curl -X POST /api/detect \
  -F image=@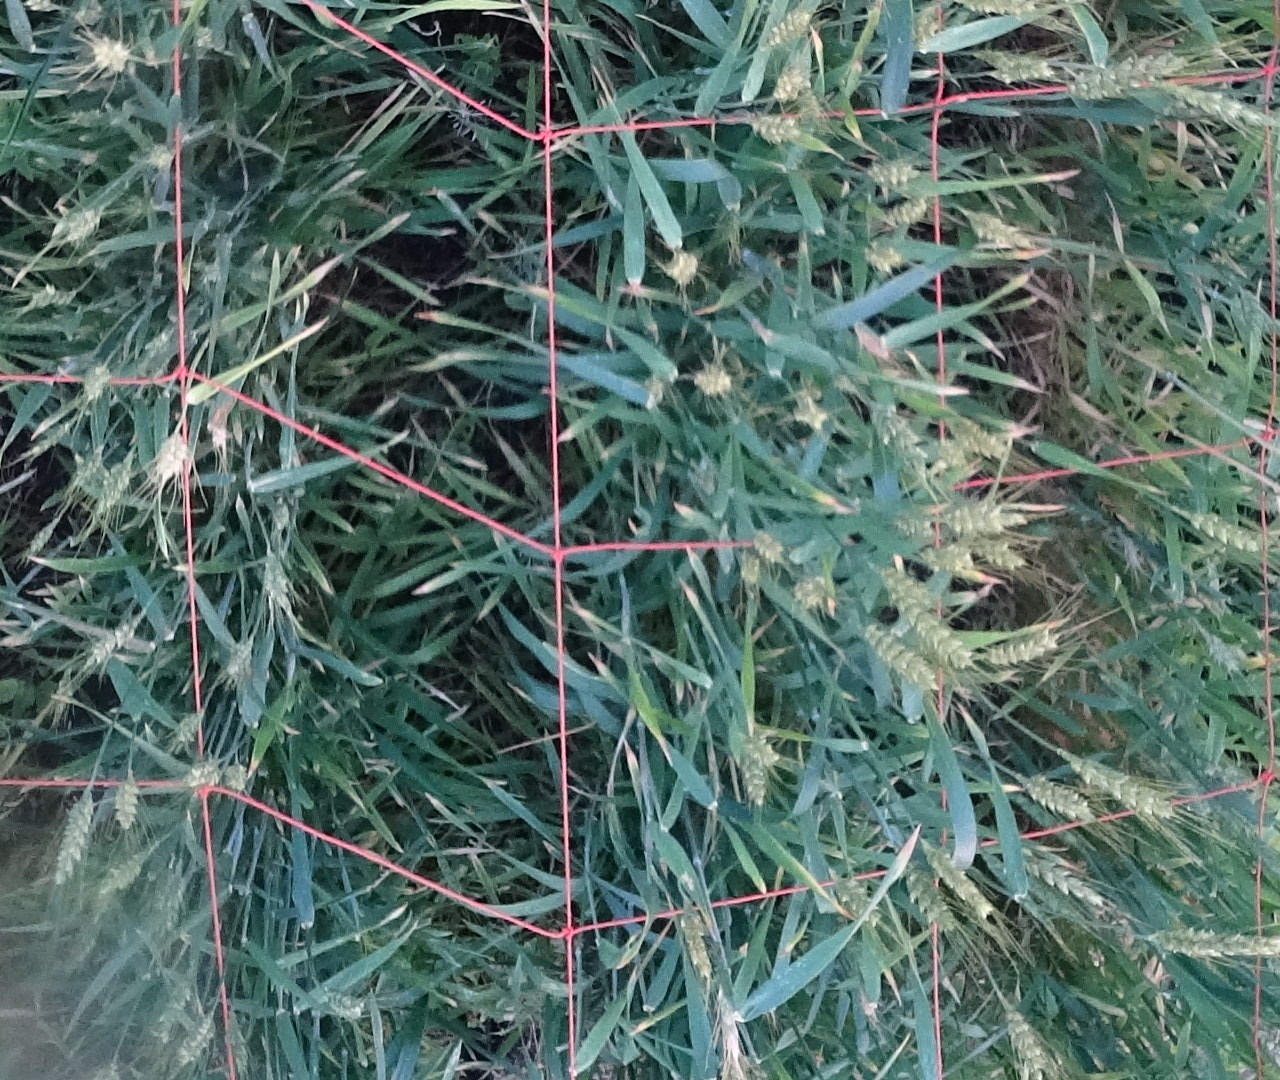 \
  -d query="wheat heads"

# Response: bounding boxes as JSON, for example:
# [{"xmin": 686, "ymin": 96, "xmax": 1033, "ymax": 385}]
[
  {"xmin": 960, "ymin": 203, "xmax": 1030, "ymax": 248},
  {"xmin": 1010, "ymin": 765, "xmax": 1092, "ymax": 832},
  {"xmin": 1188, "ymin": 501, "xmax": 1263, "ymax": 552},
  {"xmin": 665, "ymin": 258, "xmax": 698, "ymax": 285},
  {"xmin": 261, "ymin": 551, "xmax": 284, "ymax": 614},
  {"xmin": 860, "ymin": 243, "xmax": 897, "ymax": 267},
  {"xmin": 732, "ymin": 722, "xmax": 769, "ymax": 791},
  {"xmin": 730, "ymin": 557, "xmax": 759, "ymax": 586},
  {"xmin": 1006, "ymin": 845, "xmax": 1109, "ymax": 909},
  {"xmin": 82, "ymin": 622, "xmax": 134, "ymax": 671},
  {"xmin": 316, "ymin": 986, "xmax": 360, "ymax": 1024},
  {"xmin": 879, "ymin": 405, "xmax": 918, "ymax": 461},
  {"xmin": 153, "ymin": 882, "xmax": 197, "ymax": 934},
  {"xmin": 54, "ymin": 795, "xmax": 96, "ymax": 877},
  {"xmin": 64, "ymin": 214, "xmax": 103, "ymax": 239},
  {"xmin": 94, "ymin": 849, "xmax": 152, "ymax": 889},
  {"xmin": 760, "ymin": 9, "xmax": 821, "ymax": 47},
  {"xmin": 145, "ymin": 144, "xmax": 179, "ymax": 174},
  {"xmin": 1179, "ymin": 84, "xmax": 1275, "ymax": 128},
  {"xmin": 895, "ymin": 868, "xmax": 963, "ymax": 957},
  {"xmin": 789, "ymin": 390, "xmax": 823, "ymax": 433},
  {"xmin": 149, "ymin": 436, "xmax": 188, "ymax": 482},
  {"xmin": 231, "ymin": 761, "xmax": 256, "ymax": 791},
  {"xmin": 1003, "ymin": 1005, "xmax": 1049, "ymax": 1073},
  {"xmin": 226, "ymin": 645, "xmax": 254, "ymax": 679},
  {"xmin": 29, "ymin": 285, "xmax": 82, "ymax": 311},
  {"xmin": 770, "ymin": 68, "xmax": 814, "ymax": 92},
  {"xmin": 877, "ymin": 193, "xmax": 928, "ymax": 224},
  {"xmin": 1135, "ymin": 930, "xmax": 1280, "ymax": 959},
  {"xmin": 745, "ymin": 117, "xmax": 794, "ymax": 146},
  {"xmin": 176, "ymin": 709, "xmax": 204, "ymax": 745},
  {"xmin": 821, "ymin": 870, "xmax": 884, "ymax": 930},
  {"xmin": 745, "ymin": 526, "xmax": 781, "ymax": 554},
  {"xmin": 937, "ymin": 500, "xmax": 1002, "ymax": 530},
  {"xmin": 666, "ymin": 887, "xmax": 709, "ymax": 965},
  {"xmin": 920, "ymin": 840, "xmax": 991, "ymax": 916},
  {"xmin": 1055, "ymin": 753, "xmax": 1170, "ymax": 818},
  {"xmin": 976, "ymin": 53, "xmax": 1048, "ymax": 83},
  {"xmin": 973, "ymin": 538, "xmax": 1026, "ymax": 569},
  {"xmin": 114, "ymin": 775, "xmax": 137, "ymax": 826},
  {"xmin": 954, "ymin": 403, "xmax": 998, "ymax": 456},
  {"xmin": 987, "ymin": 623, "xmax": 1049, "ymax": 666},
  {"xmin": 99, "ymin": 45, "xmax": 130, "ymax": 72},
  {"xmin": 692, "ymin": 358, "xmax": 734, "ymax": 397},
  {"xmin": 1068, "ymin": 52, "xmax": 1181, "ymax": 92},
  {"xmin": 852, "ymin": 158, "xmax": 913, "ymax": 182},
  {"xmin": 178, "ymin": 1018, "xmax": 214, "ymax": 1059},
  {"xmin": 1204, "ymin": 623, "xmax": 1248, "ymax": 676},
  {"xmin": 869, "ymin": 563, "xmax": 961, "ymax": 666},
  {"xmin": 79, "ymin": 360, "xmax": 110, "ymax": 400},
  {"xmin": 792, "ymin": 567, "xmax": 833, "ymax": 613},
  {"xmin": 859, "ymin": 627, "xmax": 936, "ymax": 688},
  {"xmin": 181, "ymin": 761, "xmax": 215, "ymax": 799},
  {"xmin": 95, "ymin": 466, "xmax": 133, "ymax": 515},
  {"xmin": 153, "ymin": 972, "xmax": 193, "ymax": 1037}
]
